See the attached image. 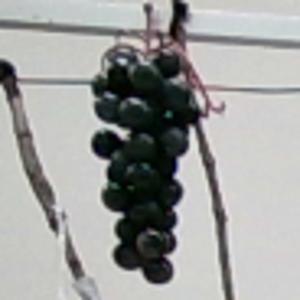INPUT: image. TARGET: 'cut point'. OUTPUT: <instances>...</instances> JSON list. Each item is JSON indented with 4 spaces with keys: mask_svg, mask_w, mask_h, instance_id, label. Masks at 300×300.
<instances>
[{
    "mask_svg": "<svg viewBox=\"0 0 300 300\" xmlns=\"http://www.w3.org/2000/svg\"><path fill=\"white\" fill-rule=\"evenodd\" d=\"M154 9V0H142V13L145 16V46L142 60L144 63L152 56Z\"/></svg>",
    "mask_w": 300,
    "mask_h": 300,
    "instance_id": "6a23745f",
    "label": "cut point"
}]
</instances>
